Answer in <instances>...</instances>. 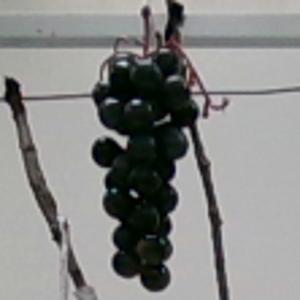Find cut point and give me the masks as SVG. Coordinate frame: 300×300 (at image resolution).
I'll use <instances>...</instances> for the list:
<instances>
[{
	"label": "cut point",
	"mask_w": 300,
	"mask_h": 300,
	"mask_svg": "<svg viewBox=\"0 0 300 300\" xmlns=\"http://www.w3.org/2000/svg\"><path fill=\"white\" fill-rule=\"evenodd\" d=\"M153 16L151 0H142L138 18L142 21V56L150 55V21Z\"/></svg>",
	"instance_id": "cut-point-1"
}]
</instances>
